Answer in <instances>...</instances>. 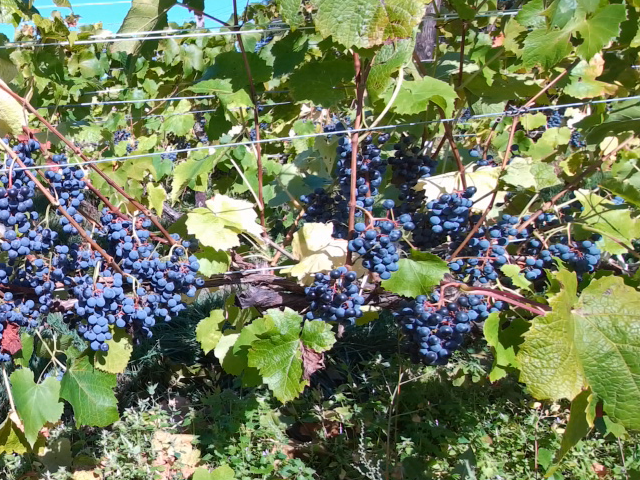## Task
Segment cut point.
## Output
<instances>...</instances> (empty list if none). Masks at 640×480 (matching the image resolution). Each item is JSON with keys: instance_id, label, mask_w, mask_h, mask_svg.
Here are the masks:
<instances>
[{"instance_id": "obj_1", "label": "cut point", "mask_w": 640, "mask_h": 480, "mask_svg": "<svg viewBox=\"0 0 640 480\" xmlns=\"http://www.w3.org/2000/svg\"><path fill=\"white\" fill-rule=\"evenodd\" d=\"M139 212H141V209H137L132 216V229H133V233H136V227H135V219L138 216Z\"/></svg>"}, {"instance_id": "obj_2", "label": "cut point", "mask_w": 640, "mask_h": 480, "mask_svg": "<svg viewBox=\"0 0 640 480\" xmlns=\"http://www.w3.org/2000/svg\"><path fill=\"white\" fill-rule=\"evenodd\" d=\"M356 208H358L361 212L365 213L366 215H368L369 218H372V214L371 212L367 211L366 209L362 208L360 205L356 204Z\"/></svg>"}, {"instance_id": "obj_3", "label": "cut point", "mask_w": 640, "mask_h": 480, "mask_svg": "<svg viewBox=\"0 0 640 480\" xmlns=\"http://www.w3.org/2000/svg\"><path fill=\"white\" fill-rule=\"evenodd\" d=\"M76 155H77V154H76V153H74V152H72L71 154H69V155H68V158H67V162H70L72 157H73V159H74L75 161H76V160H79V159H78V157H77Z\"/></svg>"}]
</instances>
